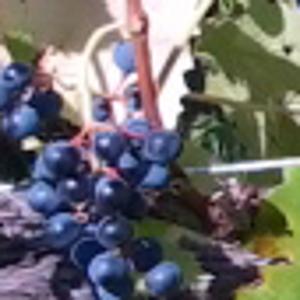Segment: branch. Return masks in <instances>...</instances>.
<instances>
[{
	"label": "branch",
	"instance_id": "branch-1",
	"mask_svg": "<svg viewBox=\"0 0 300 300\" xmlns=\"http://www.w3.org/2000/svg\"><path fill=\"white\" fill-rule=\"evenodd\" d=\"M126 7L129 18L126 34L134 43V64L141 107L146 122L150 125H156L160 122L161 115L156 102L149 59V16L143 11L142 0H127Z\"/></svg>",
	"mask_w": 300,
	"mask_h": 300
},
{
	"label": "branch",
	"instance_id": "branch-2",
	"mask_svg": "<svg viewBox=\"0 0 300 300\" xmlns=\"http://www.w3.org/2000/svg\"><path fill=\"white\" fill-rule=\"evenodd\" d=\"M173 170L172 188L179 200L198 216H204L209 211V201L203 196L196 185L181 173L178 165L169 162Z\"/></svg>",
	"mask_w": 300,
	"mask_h": 300
}]
</instances>
